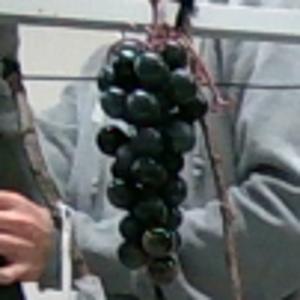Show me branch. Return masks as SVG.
<instances>
[{
    "instance_id": "1",
    "label": "branch",
    "mask_w": 300,
    "mask_h": 300,
    "mask_svg": "<svg viewBox=\"0 0 300 300\" xmlns=\"http://www.w3.org/2000/svg\"><path fill=\"white\" fill-rule=\"evenodd\" d=\"M0 76L9 85L19 133V145L26 157L33 184L49 210L53 225L64 245L68 264L83 290L85 300H106L79 252L75 236L60 206V195L41 151L35 127L34 111L28 103V91L22 81L20 62L10 54L0 55Z\"/></svg>"
},
{
    "instance_id": "2",
    "label": "branch",
    "mask_w": 300,
    "mask_h": 300,
    "mask_svg": "<svg viewBox=\"0 0 300 300\" xmlns=\"http://www.w3.org/2000/svg\"><path fill=\"white\" fill-rule=\"evenodd\" d=\"M198 127L204 138L207 160L219 203V212L222 221V256L231 300H247L241 273L236 263V229L226 172L215 143L211 139L207 116L204 120L198 122Z\"/></svg>"
},
{
    "instance_id": "3",
    "label": "branch",
    "mask_w": 300,
    "mask_h": 300,
    "mask_svg": "<svg viewBox=\"0 0 300 300\" xmlns=\"http://www.w3.org/2000/svg\"><path fill=\"white\" fill-rule=\"evenodd\" d=\"M178 4L174 14V30L177 39L191 47V20L199 14V6L196 0H170Z\"/></svg>"
}]
</instances>
